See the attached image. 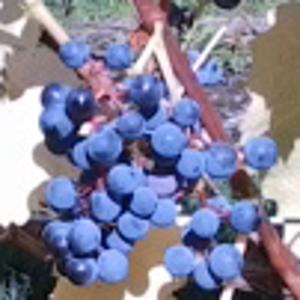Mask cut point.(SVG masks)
<instances>
[{"label": "cut point", "mask_w": 300, "mask_h": 300, "mask_svg": "<svg viewBox=\"0 0 300 300\" xmlns=\"http://www.w3.org/2000/svg\"><path fill=\"white\" fill-rule=\"evenodd\" d=\"M156 52L159 54L160 67L168 84V92L172 96L180 93L177 76L174 73L171 57L161 38L160 30H155L149 35L144 55L136 62L139 70L147 69L155 59Z\"/></svg>", "instance_id": "6a23745f"}]
</instances>
